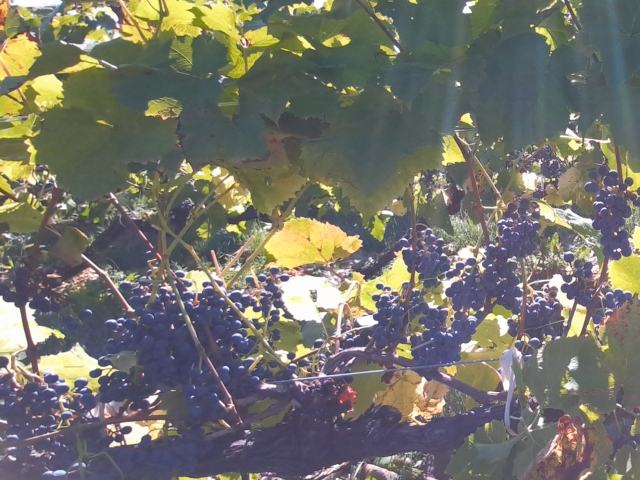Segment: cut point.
Masks as SVG:
<instances>
[{"label":"cut point","mask_w":640,"mask_h":480,"mask_svg":"<svg viewBox=\"0 0 640 480\" xmlns=\"http://www.w3.org/2000/svg\"><path fill=\"white\" fill-rule=\"evenodd\" d=\"M528 289H529L530 291H529V294H527V297H533V294H535V293L543 294V291H540V290L534 289L533 287H531V285H528Z\"/></svg>","instance_id":"obj_3"},{"label":"cut point","mask_w":640,"mask_h":480,"mask_svg":"<svg viewBox=\"0 0 640 480\" xmlns=\"http://www.w3.org/2000/svg\"><path fill=\"white\" fill-rule=\"evenodd\" d=\"M183 280L191 281L194 284L195 296H198L199 295V291H198V287H197V281L194 280L193 278H190V277H181L180 281H183Z\"/></svg>","instance_id":"obj_2"},{"label":"cut point","mask_w":640,"mask_h":480,"mask_svg":"<svg viewBox=\"0 0 640 480\" xmlns=\"http://www.w3.org/2000/svg\"><path fill=\"white\" fill-rule=\"evenodd\" d=\"M80 432L74 433V437H75V443L78 447L79 450V455H78V460L82 461L84 456H88L89 452L86 450L85 446H84V441L82 439H80Z\"/></svg>","instance_id":"obj_1"}]
</instances>
